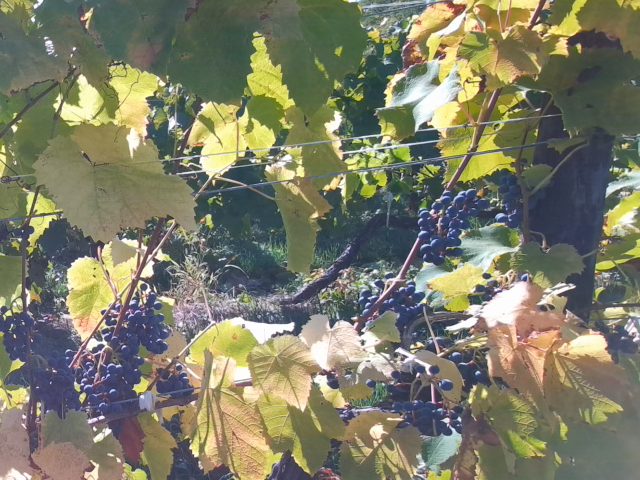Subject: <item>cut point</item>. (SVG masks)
<instances>
[{
  "instance_id": "2",
  "label": "cut point",
  "mask_w": 640,
  "mask_h": 480,
  "mask_svg": "<svg viewBox=\"0 0 640 480\" xmlns=\"http://www.w3.org/2000/svg\"><path fill=\"white\" fill-rule=\"evenodd\" d=\"M21 297H23V294H19V295H17V296H15V297H13V298L11 299V301H10V305H13L14 303H17V299H19V298H21Z\"/></svg>"
},
{
  "instance_id": "1",
  "label": "cut point",
  "mask_w": 640,
  "mask_h": 480,
  "mask_svg": "<svg viewBox=\"0 0 640 480\" xmlns=\"http://www.w3.org/2000/svg\"><path fill=\"white\" fill-rule=\"evenodd\" d=\"M528 232H530V233H534V234H538V235H540V236L542 237V240H543V241H546V237H545V235H544V233H543V232H541V231H536V230H532V229H528Z\"/></svg>"
}]
</instances>
